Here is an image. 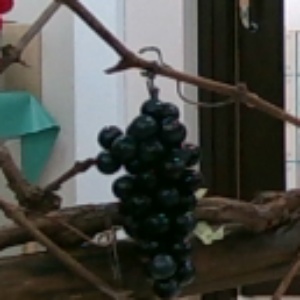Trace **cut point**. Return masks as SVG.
<instances>
[{"instance_id": "1", "label": "cut point", "mask_w": 300, "mask_h": 300, "mask_svg": "<svg viewBox=\"0 0 300 300\" xmlns=\"http://www.w3.org/2000/svg\"><path fill=\"white\" fill-rule=\"evenodd\" d=\"M156 73L151 68H146V88L151 98H158L159 89L153 85Z\"/></svg>"}]
</instances>
